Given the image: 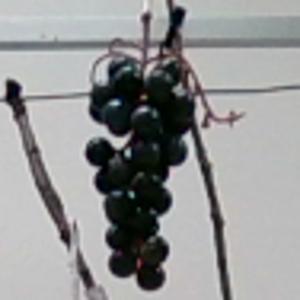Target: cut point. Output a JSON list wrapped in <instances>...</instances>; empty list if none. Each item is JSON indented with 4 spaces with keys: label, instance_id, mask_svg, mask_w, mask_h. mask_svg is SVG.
<instances>
[{
    "label": "cut point",
    "instance_id": "cut-point-1",
    "mask_svg": "<svg viewBox=\"0 0 300 300\" xmlns=\"http://www.w3.org/2000/svg\"><path fill=\"white\" fill-rule=\"evenodd\" d=\"M156 0H141L138 19L141 22L139 42V62L142 77L145 79L148 68V48L151 40V20L154 18L153 5Z\"/></svg>",
    "mask_w": 300,
    "mask_h": 300
}]
</instances>
